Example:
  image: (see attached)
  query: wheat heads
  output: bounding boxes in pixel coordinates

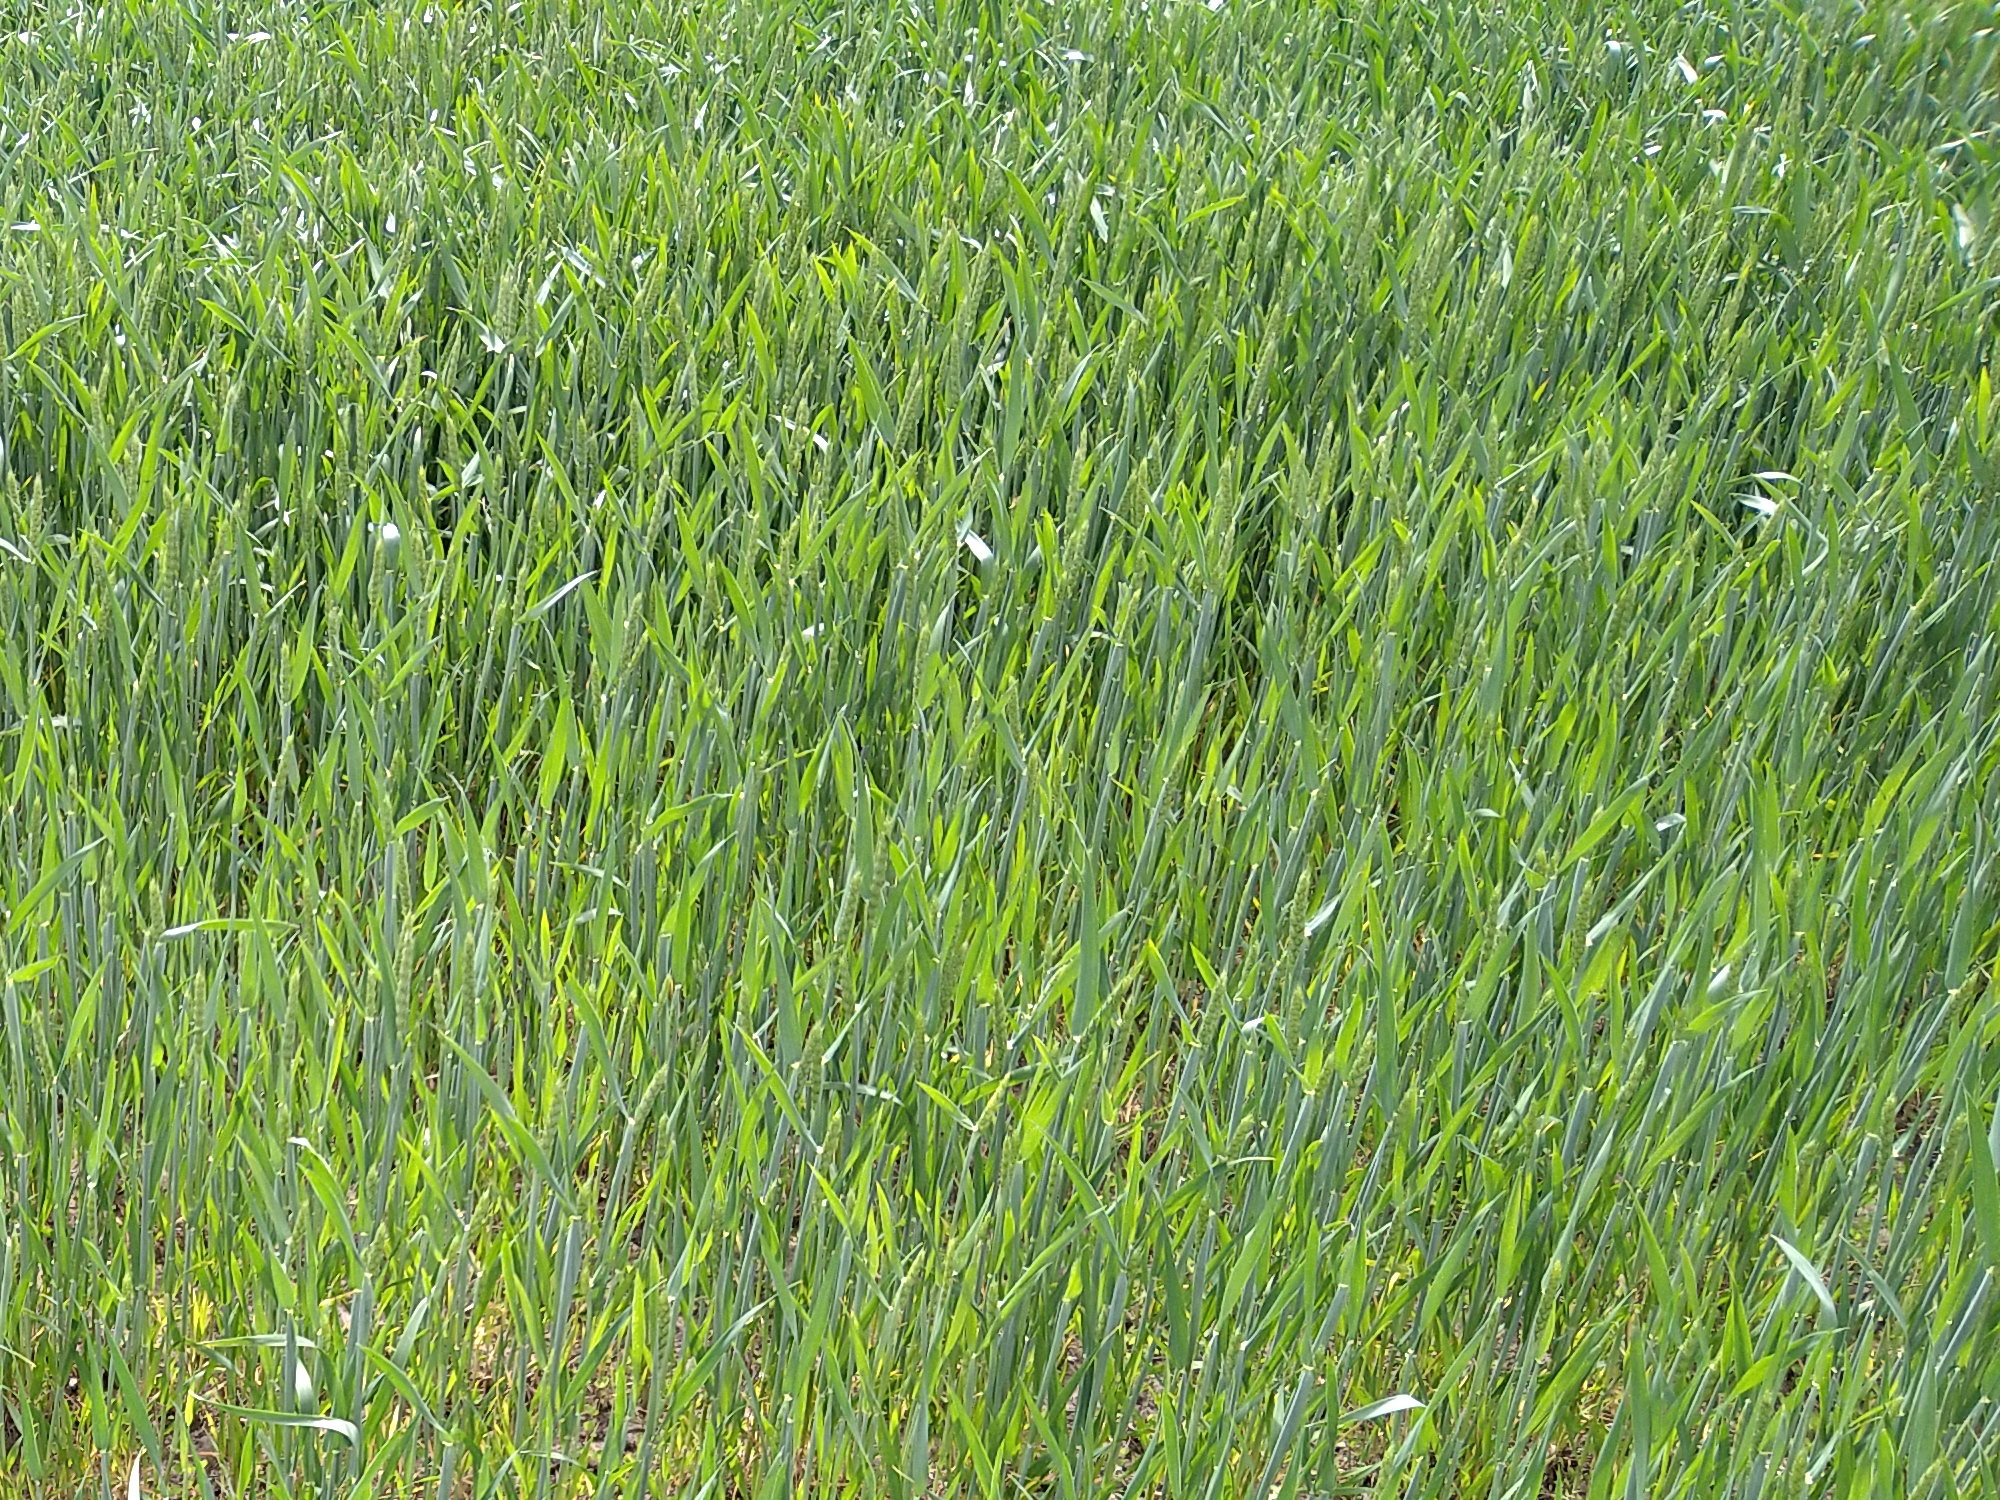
[944,156,954,206]
[1068,60,1083,99]
[1381,109,1394,146]
[106,413,117,440]
[1213,453,1234,528]
[891,288,904,339]
[958,712,983,798]
[245,208,260,265]
[1218,307,1234,344]
[1673,526,1703,588]
[1904,247,1933,324]
[410,527,427,588]
[1096,423,1103,476]
[1004,134,1019,161]
[277,1102,288,1139]
[642,265,664,322]
[874,158,895,224]
[542,28,556,67]
[947,340,960,405]
[1070,21,1077,55]
[1529,142,1549,187]
[1347,13,1364,60]
[131,438,143,502]
[978,158,998,214]
[337,428,352,503]
[443,554,458,618]
[903,239,915,277]
[1582,457,1592,506]
[1812,667,1850,743]
[836,955,854,1038]
[1696,193,1718,264]
[1065,192,1090,255]
[1111,180,1134,268]
[1000,1134,1011,1187]
[1710,297,1730,371]
[1987,392,2000,435]
[1798,1142,1819,1175]
[262,445,269,479]
[1539,386,1566,446]
[1783,533,1794,590]
[230,501,240,542]
[1613,59,1621,107]
[367,1163,384,1208]
[150,877,165,949]
[898,1251,926,1317]
[1538,1263,1562,1336]
[1391,509,1401,569]
[1904,619,1918,657]
[1024,415,1037,459]
[1256,301,1284,363]
[1278,219,1293,264]
[715,82,724,128]
[1656,447,1680,511]
[1028,753,1041,804]
[1619,583,1638,641]
[299,497,315,557]
[1478,178,1499,237]
[1624,223,1641,287]
[1454,324,1475,382]
[438,324,458,373]
[450,13,459,64]
[1477,890,1500,979]
[588,332,599,397]
[255,456,261,485]
[968,379,985,433]
[385,319,403,359]
[959,243,992,335]
[1512,141,1527,185]
[1613,652,1625,709]
[5,802,14,852]
[124,389,139,423]
[789,400,809,476]
[152,58,163,104]
[1745,503,1788,562]
[1042,446,1056,490]
[365,1225,385,1274]
[1440,315,1457,380]
[1940,268,1978,340]
[1032,964,1067,1024]
[542,1084,564,1149]
[885,385,898,420]
[962,466,984,505]
[1804,188,1830,249]
[1754,1398,1770,1454]
[742,17,747,73]
[1564,528,1575,564]
[672,435,681,483]
[937,231,953,258]
[275,53,283,84]
[282,51,295,109]
[641,333,652,393]
[1897,232,1930,295]
[1925,1112,1972,1220]
[234,130,249,195]
[1316,399,1326,416]
[1978,440,2000,526]
[782,537,789,602]
[1176,163,1195,212]
[631,1068,668,1146]
[1499,216,1540,312]
[303,43,316,90]
[990,565,1007,611]
[70,271,79,326]
[1418,237,1446,288]
[771,330,785,366]
[888,958,905,1014]
[785,221,810,275]
[1246,343,1276,418]
[348,801,364,867]
[1309,348,1344,412]
[256,615,268,653]
[1243,944,1261,989]
[784,321,802,397]
[748,32,761,77]
[748,514,761,572]
[410,129,418,164]
[144,175,155,238]
[1398,447,1417,513]
[1010,677,1022,746]
[687,95,697,145]
[279,644,291,700]
[1619,1055,1646,1103]
[294,51,302,100]
[1253,198,1273,271]
[1495,547,1510,581]
[1099,65,1110,122]
[135,634,158,712]
[591,656,599,742]
[1841,517,1857,573]
[801,180,811,235]
[1798,214,1851,272]
[1734,432,1759,480]
[582,0,597,56]
[1721,270,1749,331]
[1106,324,1138,402]
[1566,188,1583,229]
[121,114,129,156]
[666,373,687,419]
[1429,398,1466,472]
[1805,598,1825,650]
[13,292,25,350]
[392,107,403,150]
[1125,340,1141,382]
[941,924,965,1011]
[871,832,892,917]
[31,807,42,872]
[1069,84,1080,126]
[526,281,537,361]
[792,291,805,324]
[1288,989,1305,1061]
[761,453,773,492]
[372,665,380,711]
[417,594,431,637]
[700,594,709,636]
[1839,592,1860,636]
[842,372,852,417]
[1316,1068,1331,1099]
[1412,118,1428,155]
[827,626,843,685]
[787,87,804,142]
[1881,283,1909,339]
[268,735,295,812]
[1113,583,1131,638]
[1879,416,1900,458]
[1406,107,1418,152]
[929,263,952,306]
[707,563,723,617]
[1608,595,1629,642]
[174,19,184,57]
[812,1058,824,1110]
[660,1299,673,1381]
[690,356,700,408]
[283,967,300,1071]
[1846,266,1862,302]
[1479,719,1493,774]
[1348,224,1374,290]
[1694,207,1707,248]
[65,676,75,724]
[914,1013,926,1062]
[490,457,502,524]
[614,312,633,370]
[382,802,392,845]
[1590,135,1615,199]
[1224,243,1251,319]
[670,80,680,101]
[0,928,8,994]
[893,374,926,464]
[1663,214,1693,263]
[750,259,771,312]
[1724,949,1743,998]
[1174,397,1185,442]
[1307,606,1328,649]
[1045,1152,1060,1218]
[32,134,41,188]
[924,443,928,470]
[398,349,422,418]
[30,478,42,558]
[905,553,916,626]
[984,441,998,472]
[1926,983,1970,1059]
[1228,1116,1253,1159]
[1921,572,1943,605]
[509,285,520,332]
[401,33,408,69]
[1408,288,1426,355]
[713,285,722,322]
[1664,639,1698,732]
[815,1112,842,1205]
[364,10,371,65]
[1726,153,1755,219]
[1305,186,1329,232]
[1217,525,1236,579]
[370,312,384,348]
[334,343,354,387]
[140,266,162,338]
[1834,73,1857,113]
[616,150,628,217]
[1815,680,1843,745]
[269,545,285,629]
[574,416,588,494]
[1973,207,2000,256]
[799,294,814,328]
[1265,209,1283,242]
[559,406,574,463]
[1380,1091,1412,1172]
[1919,256,1950,328]
[1065,449,1081,542]
[105,194,114,225]
[417,466,427,498]
[974,1073,1009,1140]
[923,467,935,520]
[797,365,815,402]
[1417,939,1431,983]
[638,258,658,303]
[833,870,860,964]
[1171,327,1188,366]
[1400,545,1410,576]
[1823,257,1842,321]
[366,541,385,604]
[1273,955,1289,993]
[1131,458,1150,524]
[372,11,378,84]
[675,153,695,213]
[398,223,416,286]
[491,275,510,323]
[397,841,412,915]
[1463,600,1482,664]
[5,186,18,215]
[1461,447,1474,477]
[399,935,415,1044]
[1693,237,1725,307]
[642,474,668,555]
[293,328,307,390]
[837,526,853,579]
[1474,287,1503,348]
[207,522,229,591]
[992,985,1007,1073]
[290,264,303,303]
[1288,872,1310,975]
[100,846,114,950]
[742,636,755,668]
[1144,297,1163,335]
[55,263,65,311]
[1403,254,1422,300]
[631,397,640,472]
[1381,283,1401,345]
[510,119,516,169]
[516,567,528,617]
[1512,498,1537,558]
[1812,455,1826,502]
[1877,1100,1895,1178]
[1149,375,1156,408]
[918,523,937,568]
[1123,588,1140,639]
[1557,61,1587,130]
[20,264,36,326]
[793,519,800,549]
[1650,406,1672,463]
[655,1114,670,1174]
[170,328,186,377]
[1921,579,1940,607]
[1286,451,1305,531]
[496,185,506,242]
[1155,756,1184,820]
[1962,446,1983,481]
[1380,430,1394,485]
[308,214,315,253]
[34,1013,53,1087]
[1590,57,1595,98]
[1577,511,1591,581]
[1626,292,1648,329]
[90,389,107,442]
[857,561,865,607]
[1243,210,1258,245]
[1606,292,1621,354]
[1941,376,1963,426]
[1822,907,1836,946]
[745,211,762,258]
[1901,618,1916,662]
[0,288,10,380]
[1306,585,1320,635]
[434,969,445,1043]
[1535,235,1570,322]
[822,205,842,249]
[677,190,698,267]
[677,314,690,369]
[467,1194,490,1247]
[622,629,649,679]
[1787,871,1801,926]
[464,935,474,1029]
[7,470,22,521]
[526,504,540,566]
[1070,977,1131,1063]
[976,483,990,523]
[1346,1029,1374,1122]
[758,275,774,329]
[785,26,796,67]
[560,1,571,36]
[542,183,555,234]
[1477,303,1510,376]
[18,486,30,513]
[438,275,456,318]
[1343,177,1372,263]
[723,321,736,374]
[1580,602,1594,655]
[665,290,680,325]
[1058,531,1079,594]
[941,1239,958,1308]
[587,435,599,492]
[1309,772,1329,841]
[799,563,810,596]
[791,1026,823,1099]
[1145,437,1164,491]
[818,443,833,504]
[1058,341,1070,376]
[1525,461,1532,518]
[483,244,494,290]
[1328,507,1338,555]
[618,594,642,674]
[506,420,518,466]
[1386,571,1400,618]
[161,487,175,509]
[1731,540,1742,583]
[1490,415,1498,478]
[1108,472,1137,549]
[424,33,429,80]
[1326,435,1342,496]
[1827,190,1842,229]
[1197,975,1228,1045]
[1410,475,1429,533]
[1032,313,1048,370]
[912,624,930,712]
[1848,674,1864,719]
[179,503,191,534]
[1811,393,1823,433]
[1009,437,1028,474]
[1496,168,1513,209]
[222,53,232,113]
[736,194,751,248]
[446,416,458,474]
[285,1205,307,1261]
[533,0,545,41]
[1557,189,1573,226]
[888,486,902,568]
[947,503,958,558]
[364,968,377,1015]
[269,627,279,657]
[1629,466,1651,505]
[1865,222,1884,287]
[1841,169,1857,209]
[1223,339,1235,376]
[1787,75,1802,147]
[1046,283,1074,360]
[210,10,220,52]
[808,510,818,546]
[90,546,113,642]
[1139,292,1150,328]
[927,1267,940,1324]
[1787,1449,1807,1500]
[865,282,897,335]
[270,235,290,288]
[1042,388,1064,439]
[1653,19,1675,69]
[176,205,180,265]
[444,331,463,391]
[886,222,899,259]
[501,278,511,335]
[1045,244,1071,324]
[1291,541,1315,597]
[1837,504,1862,582]
[86,1186,94,1240]
[1684,307,1715,362]
[1468,276,1498,319]
[291,454,304,496]
[26,678,37,704]
[1475,639,1486,686]
[1592,437,1605,490]
[226,277,237,317]
[1115,394,1134,446]
[1835,601,1858,648]
[1476,204,1505,285]
[79,237,91,290]
[926,728,933,760]
[1445,622,1464,674]
[1848,321,1870,368]
[1324,182,1347,211]
[340,208,348,248]
[1672,1325,1702,1391]
[1081,428,1088,463]
[1070,522,1090,590]
[1982,235,2000,270]
[476,342,488,370]
[1873,862,1885,904]
[1309,422,1334,498]
[860,251,879,328]
[1587,1237,1611,1295]
[288,485,303,520]
[121,450,135,495]
[545,489,556,549]
[1926,417,1967,495]
[458,20,465,64]
[603,238,618,304]
[241,485,251,527]
[1628,226,1670,291]
[774,28,782,61]
[678,84,687,120]
[1766,93,1788,158]
[1111,997,1136,1073]
[488,138,497,166]
[318,90,326,135]
[330,609,341,682]
[897,364,919,427]
[71,99,79,135]
[827,282,841,346]
[653,194,670,237]
[194,972,206,1056]
[11,1043,19,1104]
[97,365,111,398]
[1572,880,1595,964]
[67,765,76,815]
[808,555,817,608]
[666,1002,679,1054]
[162,520,178,595]
[1818,211,1832,250]
[1183,189,1207,269]
[1891,1459,1942,1500]
[816,313,831,367]
[1183,285,1212,370]
[712,1217,721,1281]
[935,344,949,397]
[153,275,170,329]
[355,405,371,478]
[154,104,163,163]
[1811,108,1841,160]
[761,70,775,117]
[311,1115,319,1153]
[411,17,418,60]
[1373,1208,1409,1285]
[1363,369,1386,414]
[783,227,795,266]
[1706,442,1725,480]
